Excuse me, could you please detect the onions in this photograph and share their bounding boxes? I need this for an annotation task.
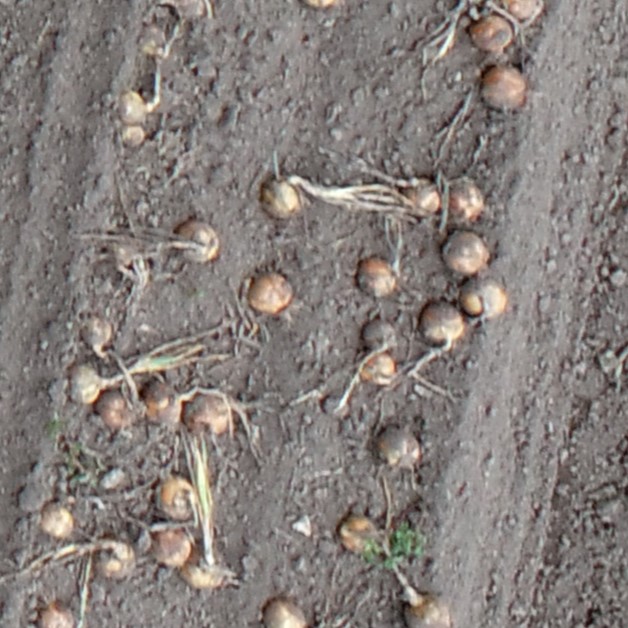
[33,604,77,628]
[336,511,375,554]
[361,350,397,386]
[96,539,132,578]
[257,176,303,219]
[458,280,508,319]
[470,14,512,54]
[119,123,146,148]
[81,315,110,350]
[149,525,191,569]
[258,596,306,628]
[38,503,75,539]
[244,272,291,316]
[378,428,423,467]
[185,551,229,591]
[444,182,483,223]
[116,90,146,122]
[69,369,104,406]
[417,302,461,344]
[481,66,526,110]
[442,232,488,273]
[501,0,540,25]
[94,394,132,432]
[156,476,194,518]
[407,179,441,214]
[142,381,179,425]
[174,219,216,262]
[303,0,341,10]
[360,314,396,353]
[354,256,396,297]
[404,592,450,628]
[137,34,166,59]
[180,390,238,437]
